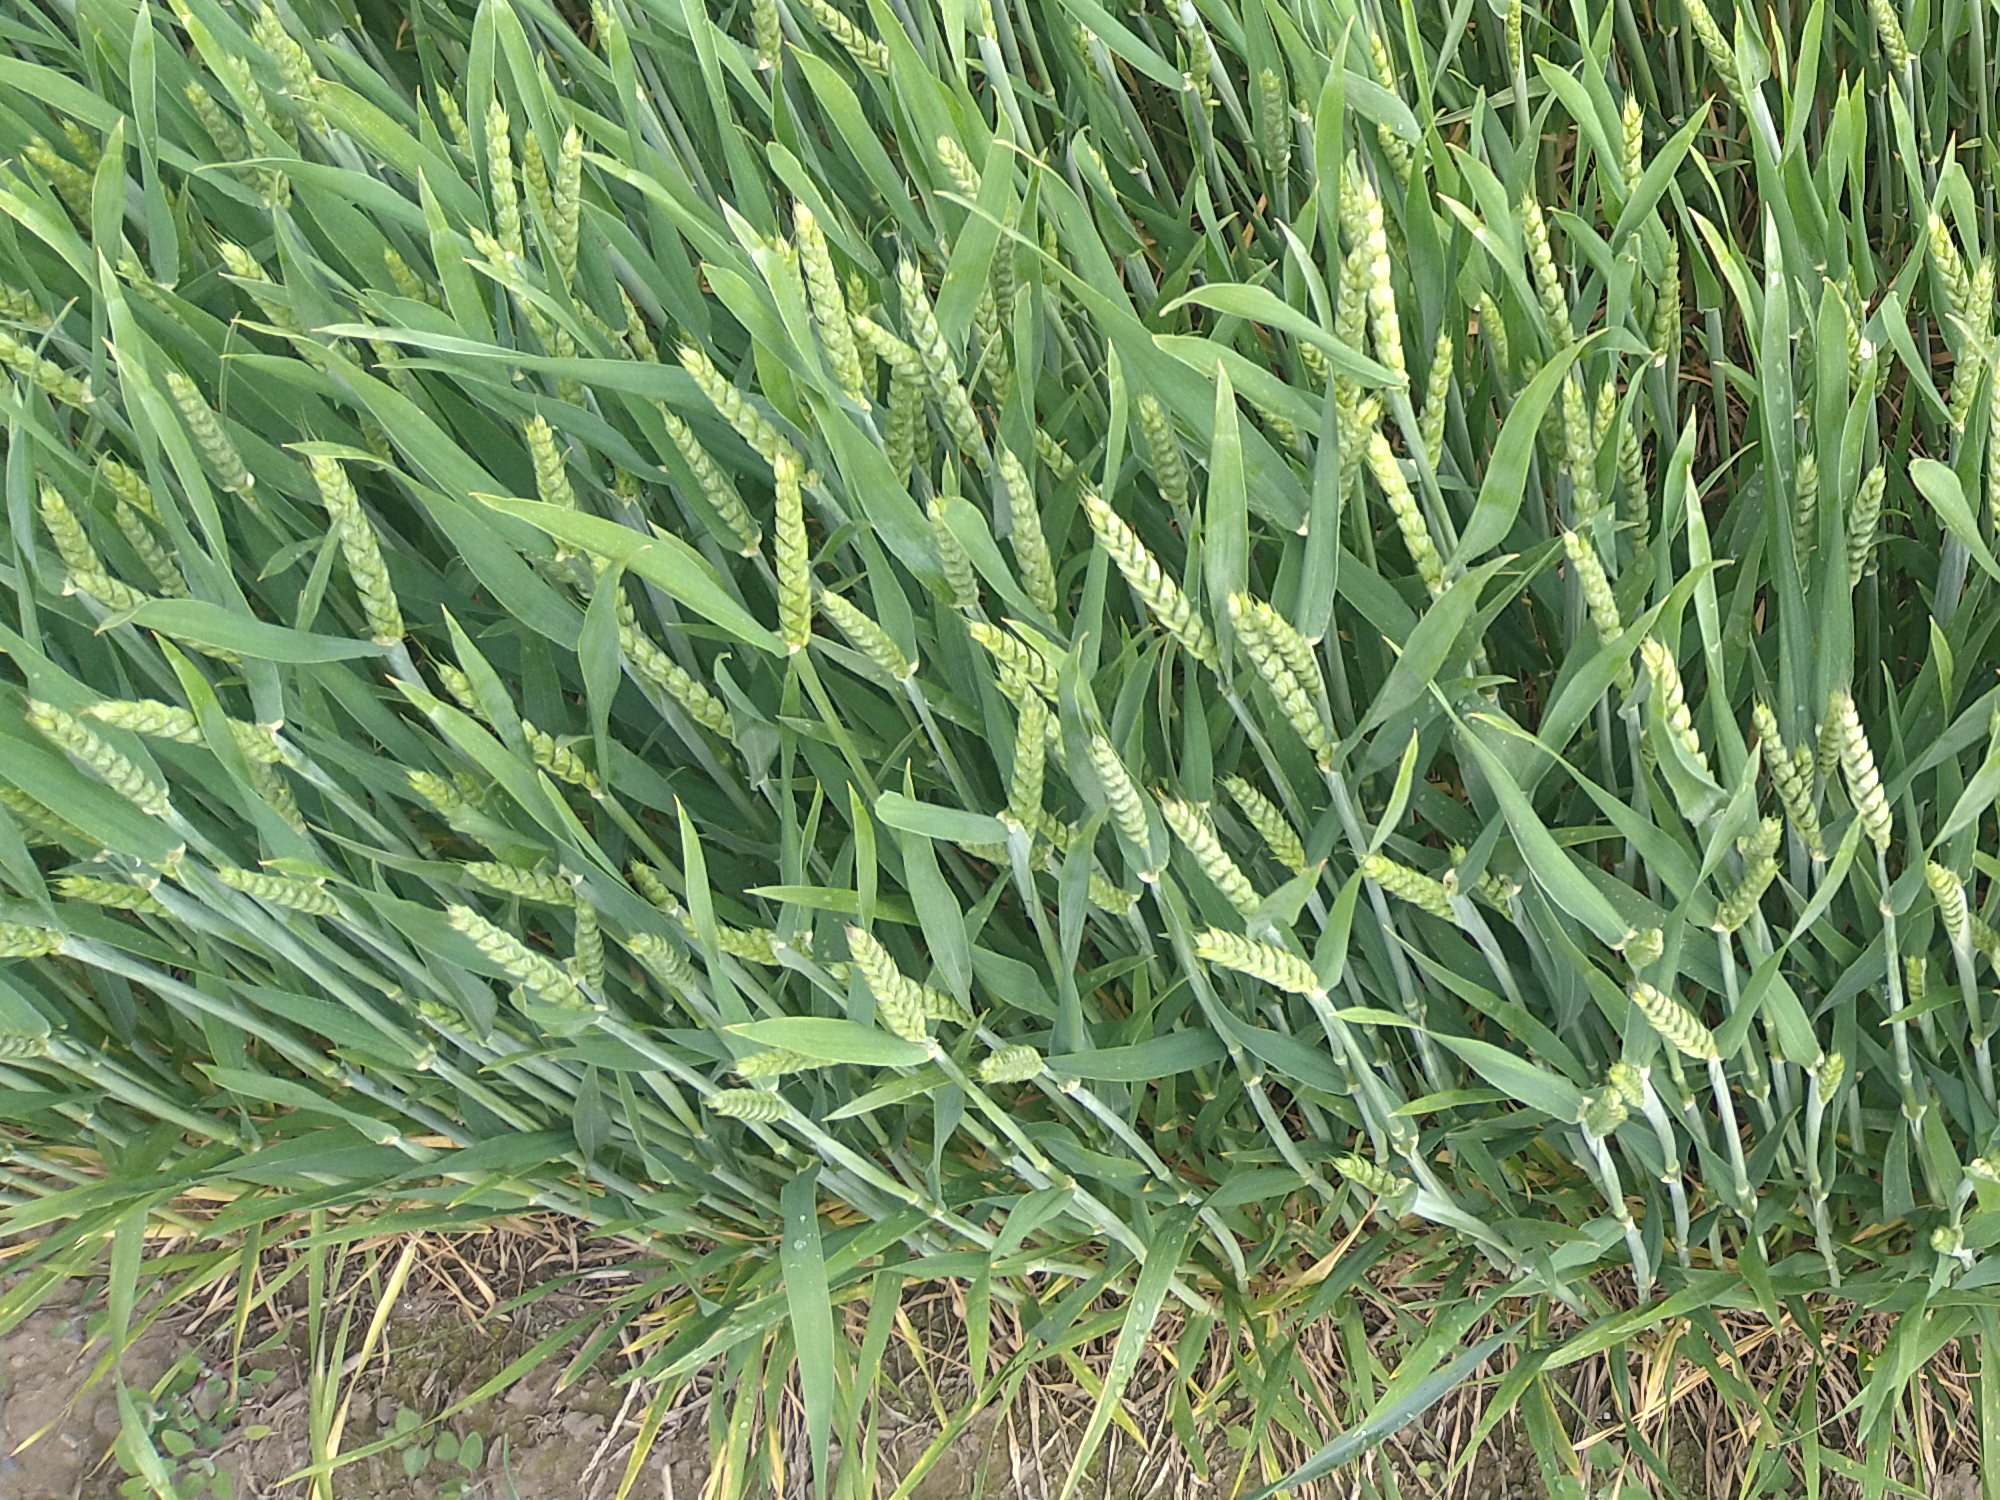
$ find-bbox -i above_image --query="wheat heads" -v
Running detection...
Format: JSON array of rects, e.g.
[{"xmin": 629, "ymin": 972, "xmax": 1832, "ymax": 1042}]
[
  {"xmin": 629, "ymin": 931, "xmax": 687, "ymax": 976},
  {"xmin": 1523, "ymin": 194, "xmax": 1583, "ymax": 388},
  {"xmin": 219, "ymin": 245, "xmax": 357, "ymax": 369},
  {"xmin": 928, "ymin": 505, "xmax": 991, "ymax": 600},
  {"xmin": 569, "ymin": 900, "xmax": 604, "ymax": 991},
  {"xmin": 69, "ymin": 571, "xmax": 255, "ymax": 670},
  {"xmin": 0, "ymin": 335, "xmax": 90, "ymax": 413},
  {"xmin": 0, "ymin": 773, "xmax": 109, "ymax": 846},
  {"xmin": 1334, "ymin": 1154, "xmax": 1409, "ymax": 1198},
  {"xmin": 1253, "ymin": 597, "xmax": 1328, "ymax": 697},
  {"xmin": 899, "ymin": 264, "xmax": 995, "ymax": 476},
  {"xmin": 32, "ymin": 480, "xmax": 112, "ymax": 576},
  {"xmin": 166, "ymin": 372, "xmax": 245, "ymax": 489},
  {"xmin": 0, "ymin": 919, "xmax": 57, "ymax": 953},
  {"xmin": 1452, "ymin": 839, "xmax": 1519, "ymax": 918},
  {"xmin": 1593, "ymin": 376, "xmax": 1619, "ymax": 454},
  {"xmin": 301, "ymin": 429, "xmax": 403, "ymax": 643},
  {"xmin": 1475, "ymin": 286, "xmax": 1516, "ymax": 369},
  {"xmin": 1523, "ymin": 355, "xmax": 1563, "ymax": 467},
  {"xmin": 1138, "ymin": 388, "xmax": 1189, "ymax": 496},
  {"xmin": 1034, "ymin": 810, "xmax": 1107, "ymax": 883},
  {"xmin": 64, "ymin": 843, "xmax": 156, "ymax": 873},
  {"xmin": 1605, "ymin": 1059, "xmax": 1647, "ymax": 1105},
  {"xmin": 613, "ymin": 632, "xmax": 735, "ymax": 734},
  {"xmin": 117, "ymin": 511, "xmax": 197, "ymax": 600},
  {"xmin": 1227, "ymin": 597, "xmax": 1329, "ymax": 751},
  {"xmin": 998, "ymin": 662, "xmax": 1067, "ymax": 779},
  {"xmin": 0, "ymin": 1021, "xmax": 45, "ymax": 1061},
  {"xmin": 608, "ymin": 461, "xmax": 645, "ymax": 525},
  {"xmin": 1261, "ymin": 66, "xmax": 1285, "ymax": 191},
  {"xmin": 818, "ymin": 592, "xmax": 913, "ymax": 681},
  {"xmin": 1366, "ymin": 22, "xmax": 1408, "ymax": 117},
  {"xmin": 1043, "ymin": 862, "xmax": 1131, "ymax": 919},
  {"xmin": 591, "ymin": 547, "xmax": 642, "ymax": 633},
  {"xmin": 86, "ymin": 705, "xmax": 277, "ymax": 765},
  {"xmin": 1087, "ymin": 735, "xmax": 1147, "ymax": 880},
  {"xmin": 454, "ymin": 770, "xmax": 549, "ymax": 833},
  {"xmin": 1614, "ymin": 401, "xmax": 1649, "ymax": 554},
  {"xmin": 1681, "ymin": 0, "xmax": 1743, "ymax": 110},
  {"xmin": 998, "ymin": 449, "xmax": 1053, "ymax": 625},
  {"xmin": 1621, "ymin": 89, "xmax": 1641, "ymax": 190},
  {"xmin": 1360, "ymin": 428, "xmax": 1452, "ymax": 604},
  {"xmin": 381, "ymin": 247, "xmax": 451, "ymax": 315},
  {"xmin": 524, "ymin": 549, "xmax": 578, "ymax": 585},
  {"xmin": 773, "ymin": 452, "xmax": 813, "ymax": 649},
  {"xmin": 1841, "ymin": 289, "xmax": 1859, "ymax": 388},
  {"xmin": 1645, "ymin": 644, "xmax": 1710, "ymax": 770},
  {"xmin": 1298, "ymin": 391, "xmax": 1389, "ymax": 534},
  {"xmin": 1080, "ymin": 490, "xmax": 1224, "ymax": 673},
  {"xmin": 1811, "ymin": 1046, "xmax": 1844, "ymax": 1100},
  {"xmin": 25, "ymin": 702, "xmax": 169, "ymax": 803},
  {"xmin": 1134, "ymin": 0, "xmax": 1218, "ymax": 67},
  {"xmin": 534, "ymin": 320, "xmax": 591, "ymax": 413},
  {"xmin": 57, "ymin": 111, "xmax": 111, "ymax": 175},
  {"xmin": 830, "ymin": 967, "xmax": 969, "ymax": 1023},
  {"xmin": 1819, "ymin": 711, "xmax": 1841, "ymax": 786},
  {"xmin": 735, "ymin": 0, "xmax": 781, "ymax": 75},
  {"xmin": 182, "ymin": 82, "xmax": 249, "ymax": 182},
  {"xmin": 353, "ymin": 320, "xmax": 416, "ymax": 400},
  {"xmin": 1338, "ymin": 169, "xmax": 1408, "ymax": 391},
  {"xmin": 630, "ymin": 856, "xmax": 689, "ymax": 924},
  {"xmin": 1377, "ymin": 127, "xmax": 1417, "ymax": 177},
  {"xmin": 225, "ymin": 867, "xmax": 338, "ymax": 910},
  {"xmin": 433, "ymin": 80, "xmax": 474, "ymax": 161},
  {"xmin": 846, "ymin": 925, "xmax": 926, "ymax": 1040},
  {"xmin": 233, "ymin": 31, "xmax": 330, "ymax": 139},
  {"xmin": 452, "ymin": 902, "xmax": 598, "ymax": 1010},
  {"xmin": 1983, "ymin": 358, "xmax": 2000, "ymax": 518},
  {"xmin": 976, "ymin": 276, "xmax": 1010, "ymax": 407},
  {"xmin": 673, "ymin": 349, "xmax": 820, "ymax": 493},
  {"xmin": 1752, "ymin": 699, "xmax": 1822, "ymax": 848},
  {"xmin": 1008, "ymin": 692, "xmax": 1043, "ymax": 836},
  {"xmin": 1509, "ymin": 0, "xmax": 1525, "ymax": 76},
  {"xmin": 1713, "ymin": 855, "xmax": 1773, "ymax": 924},
  {"xmin": 907, "ymin": 381, "xmax": 934, "ymax": 500},
  {"xmin": 1554, "ymin": 372, "xmax": 1593, "ymax": 537},
  {"xmin": 1949, "ymin": 257, "xmax": 1993, "ymax": 403},
  {"xmin": 442, "ymin": 661, "xmax": 585, "ymax": 785},
  {"xmin": 1830, "ymin": 692, "xmax": 1892, "ymax": 842},
  {"xmin": 1654, "ymin": 232, "xmax": 1678, "ymax": 343},
  {"xmin": 18, "ymin": 146, "xmax": 105, "ymax": 234},
  {"xmin": 1923, "ymin": 855, "xmax": 1968, "ymax": 956},
  {"xmin": 1905, "ymin": 946, "xmax": 1929, "ymax": 1021},
  {"xmin": 585, "ymin": 0, "xmax": 613, "ymax": 57},
  {"xmin": 1083, "ymin": 136, "xmax": 1110, "ymax": 201},
  {"xmin": 732, "ymin": 1048, "xmax": 836, "ymax": 1074},
  {"xmin": 881, "ymin": 365, "xmax": 907, "ymax": 487},
  {"xmin": 973, "ymin": 1046, "xmax": 1045, "ymax": 1083},
  {"xmin": 786, "ymin": 0, "xmax": 893, "ymax": 76},
  {"xmin": 1250, "ymin": 394, "xmax": 1315, "ymax": 468},
  {"xmin": 220, "ymin": 60, "xmax": 287, "ymax": 201},
  {"xmin": 959, "ymin": 0, "xmax": 992, "ymax": 35},
  {"xmin": 791, "ymin": 201, "xmax": 855, "ymax": 403},
  {"xmin": 519, "ymin": 130, "xmax": 554, "ymax": 241},
  {"xmin": 1297, "ymin": 340, "xmax": 1367, "ymax": 410},
  {"xmin": 525, "ymin": 414, "xmax": 592, "ymax": 556},
  {"xmin": 239, "ymin": 751, "xmax": 312, "ymax": 838},
  {"xmin": 409, "ymin": 773, "xmax": 528, "ymax": 858},
  {"xmin": 655, "ymin": 400, "xmax": 753, "ymax": 553},
  {"xmin": 60, "ymin": 880, "xmax": 184, "ymax": 921},
  {"xmin": 703, "ymin": 1086, "xmax": 781, "ymax": 1119},
  {"xmin": 764, "ymin": 238, "xmax": 805, "ymax": 315},
  {"xmin": 1360, "ymin": 851, "xmax": 1460, "ymax": 931},
  {"xmin": 1336, "ymin": 254, "xmax": 1370, "ymax": 346},
  {"xmin": 992, "ymin": 217, "xmax": 1014, "ymax": 322},
  {"xmin": 1795, "ymin": 451, "xmax": 1819, "ymax": 575},
  {"xmin": 1920, "ymin": 210, "xmax": 1980, "ymax": 311},
  {"xmin": 1563, "ymin": 530, "xmax": 1630, "ymax": 686},
  {"xmin": 541, "ymin": 131, "xmax": 582, "ymax": 285},
  {"xmin": 694, "ymin": 928, "xmax": 781, "ymax": 967},
  {"xmin": 973, "ymin": 625, "xmax": 1065, "ymax": 695},
  {"xmin": 462, "ymin": 223, "xmax": 547, "ymax": 333},
  {"xmin": 1627, "ymin": 986, "xmax": 1713, "ymax": 1056},
  {"xmin": 954, "ymin": 843, "xmax": 1056, "ymax": 868},
  {"xmin": 1866, "ymin": 0, "xmax": 1910, "ymax": 83},
  {"xmin": 1161, "ymin": 795, "xmax": 1256, "ymax": 924},
  {"xmin": 0, "ymin": 277, "xmax": 64, "ymax": 333},
  {"xmin": 845, "ymin": 276, "xmax": 877, "ymax": 400},
  {"xmin": 932, "ymin": 131, "xmax": 986, "ymax": 204},
  {"xmin": 1876, "ymin": 344, "xmax": 1894, "ymax": 390},
  {"xmin": 419, "ymin": 1002, "xmax": 496, "ymax": 1049},
  {"xmin": 1959, "ymin": 1118, "xmax": 2000, "ymax": 1195},
  {"xmin": 1224, "ymin": 775, "xmax": 1301, "ymax": 875},
  {"xmin": 1037, "ymin": 428, "xmax": 1100, "ymax": 482},
  {"xmin": 249, "ymin": 6, "xmax": 315, "ymax": 85},
  {"xmin": 483, "ymin": 104, "xmax": 521, "ymax": 260},
  {"xmin": 101, "ymin": 452, "xmax": 149, "ymax": 512},
  {"xmin": 123, "ymin": 270, "xmax": 206, "ymax": 350},
  {"xmin": 1415, "ymin": 330, "xmax": 1453, "ymax": 471},
  {"xmin": 1738, "ymin": 816, "xmax": 1783, "ymax": 865},
  {"xmin": 1196, "ymin": 928, "xmax": 1309, "ymax": 991},
  {"xmin": 1844, "ymin": 463, "xmax": 1885, "ymax": 595},
  {"xmin": 0, "ymin": 808, "xmax": 58, "ymax": 846},
  {"xmin": 473, "ymin": 858, "xmax": 572, "ymax": 902},
  {"xmin": 854, "ymin": 318, "xmax": 932, "ymax": 384}
]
